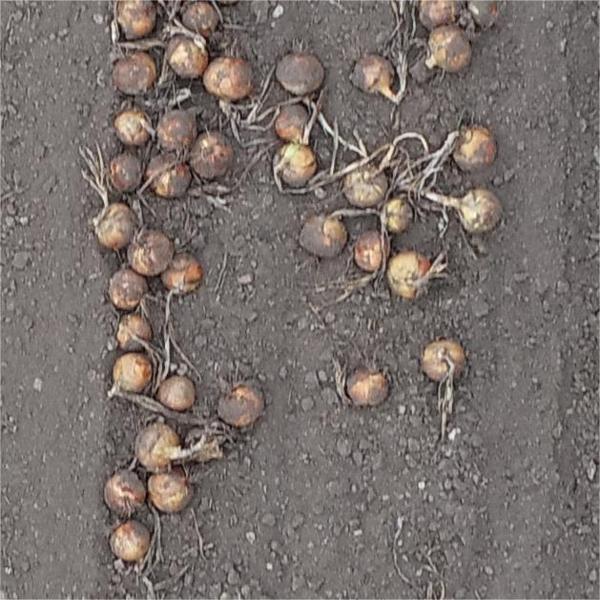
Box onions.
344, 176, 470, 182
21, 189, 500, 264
107, 151, 145, 188
276, 51, 321, 95
108, 520, 149, 560
276, 142, 315, 184
422, 339, 465, 379
346, 174, 384, 207
351, 231, 386, 270
111, 352, 151, 391
380, 198, 410, 231
204, 56, 250, 99
453, 126, 494, 166
94, 203, 137, 247
114, 53, 156, 92
150, 161, 187, 198
467, 0, 499, 29
128, 233, 170, 276
161, 255, 202, 292
165, 33, 206, 76
272, 105, 307, 139
137, 421, 179, 466
188, 131, 234, 178
157, 374, 196, 411
149, 471, 188, 510
387, 248, 436, 297
157, 109, 196, 151
345, 365, 389, 404
114, 112, 150, 144
116, 0, 156, 36
218, 382, 263, 426
425, 25, 469, 69
459, 184, 498, 230
104, 469, 144, 515
301, 216, 345, 256
117, 315, 150, 349
186, 429, 218, 461
354, 55, 398, 100
109, 271, 147, 309
419, 0, 465, 29
182, 0, 218, 33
